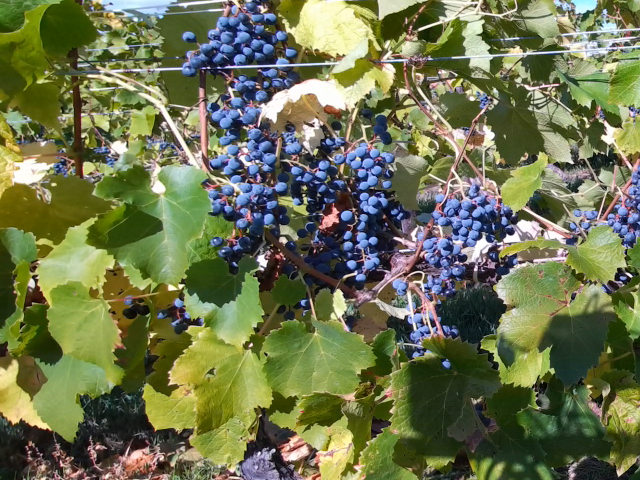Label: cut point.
Here are the masks:
<instances>
[{"label": "cut point", "instance_id": "cut-point-1", "mask_svg": "<svg viewBox=\"0 0 640 480\" xmlns=\"http://www.w3.org/2000/svg\"><path fill=\"white\" fill-rule=\"evenodd\" d=\"M206 174L210 176L211 181L215 184H219V181L224 184H230V182L222 179L221 177L216 176L215 174H212L210 171H207Z\"/></svg>", "mask_w": 640, "mask_h": 480}, {"label": "cut point", "instance_id": "cut-point-2", "mask_svg": "<svg viewBox=\"0 0 640 480\" xmlns=\"http://www.w3.org/2000/svg\"><path fill=\"white\" fill-rule=\"evenodd\" d=\"M427 312H428V306H425V320H426V323H427L428 327L430 328V331H432V325H431L430 320L428 318Z\"/></svg>", "mask_w": 640, "mask_h": 480}, {"label": "cut point", "instance_id": "cut-point-3", "mask_svg": "<svg viewBox=\"0 0 640 480\" xmlns=\"http://www.w3.org/2000/svg\"><path fill=\"white\" fill-rule=\"evenodd\" d=\"M454 175L457 177V180H458V183H459V189L463 190V186H462V181H461L460 175L455 170H454Z\"/></svg>", "mask_w": 640, "mask_h": 480}]
</instances>
